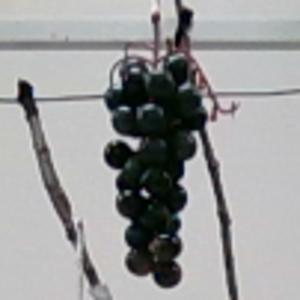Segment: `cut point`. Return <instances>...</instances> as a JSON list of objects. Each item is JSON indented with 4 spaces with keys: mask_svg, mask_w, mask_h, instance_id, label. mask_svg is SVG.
<instances>
[{
    "mask_svg": "<svg viewBox=\"0 0 300 300\" xmlns=\"http://www.w3.org/2000/svg\"><path fill=\"white\" fill-rule=\"evenodd\" d=\"M150 22L154 33V56L152 70L158 71V54L160 44L161 0H151Z\"/></svg>",
    "mask_w": 300,
    "mask_h": 300,
    "instance_id": "cut-point-1",
    "label": "cut point"
}]
</instances>
